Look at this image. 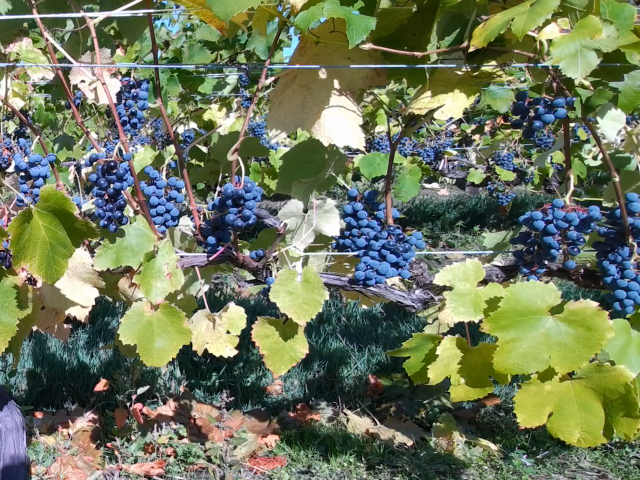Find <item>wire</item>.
I'll use <instances>...</instances> for the list:
<instances>
[{"label": "wire", "mask_w": 640, "mask_h": 480, "mask_svg": "<svg viewBox=\"0 0 640 480\" xmlns=\"http://www.w3.org/2000/svg\"><path fill=\"white\" fill-rule=\"evenodd\" d=\"M151 18H164L176 16H191L188 7H165L160 9H137L122 11H86L76 14H38V15H0V20H40V19H78L89 16H148Z\"/></svg>", "instance_id": "wire-2"}, {"label": "wire", "mask_w": 640, "mask_h": 480, "mask_svg": "<svg viewBox=\"0 0 640 480\" xmlns=\"http://www.w3.org/2000/svg\"><path fill=\"white\" fill-rule=\"evenodd\" d=\"M511 255V250H496V249H482V250H429L423 252H416V257H425L431 255Z\"/></svg>", "instance_id": "wire-3"}, {"label": "wire", "mask_w": 640, "mask_h": 480, "mask_svg": "<svg viewBox=\"0 0 640 480\" xmlns=\"http://www.w3.org/2000/svg\"><path fill=\"white\" fill-rule=\"evenodd\" d=\"M13 67H33L39 69H109V68H153V69H208V70H233V69H258V70H290V69H318V68H338V69H356V70H372V69H479V68H495L510 69L515 67H527L538 69H555L556 63L541 64L537 61L513 62L508 64L497 63H477V64H415V63H399V64H340V63H316V64H288V65H260V64H231V65H214L209 64H155V63H106V64H41L35 62H10L0 63V68Z\"/></svg>", "instance_id": "wire-1"}]
</instances>
